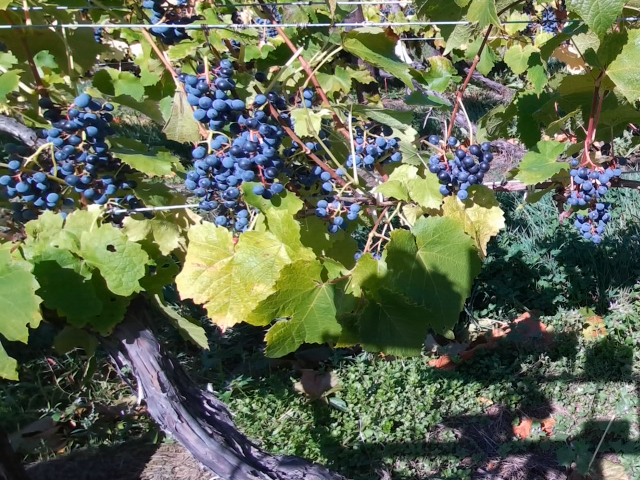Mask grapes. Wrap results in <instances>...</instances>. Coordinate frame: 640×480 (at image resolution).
Wrapping results in <instances>:
<instances>
[{
    "instance_id": "obj_1",
    "label": "grapes",
    "mask_w": 640,
    "mask_h": 480,
    "mask_svg": "<svg viewBox=\"0 0 640 480\" xmlns=\"http://www.w3.org/2000/svg\"><path fill=\"white\" fill-rule=\"evenodd\" d=\"M233 62L223 58L219 62L217 78L211 81V86L205 77H198L192 72H182L178 75L186 87L189 97L187 104L199 107L192 113V118L202 124L208 123L210 130H220L228 123V132L239 135L233 139L232 146L218 158L215 152L207 155L208 149L197 146L191 151L195 170L186 173L185 186L194 190L196 197H202L198 202L201 210H213L219 206L217 199H209L212 191L223 200L225 208H231L237 219L233 223L231 218L219 215L215 220L217 227L230 226L240 230L249 224V210L236 205V198L242 193L240 185L243 181L255 179V165L261 166L263 182L270 184L285 169V163L277 158V152L282 145L279 138L285 136V131L274 124L266 123V113L262 110L253 112V116L237 114L243 111L245 103L240 98H228V93L236 86L233 74Z\"/></svg>"
},
{
    "instance_id": "obj_2",
    "label": "grapes",
    "mask_w": 640,
    "mask_h": 480,
    "mask_svg": "<svg viewBox=\"0 0 640 480\" xmlns=\"http://www.w3.org/2000/svg\"><path fill=\"white\" fill-rule=\"evenodd\" d=\"M46 121L52 120V127L46 129L39 127L36 135L45 139L54 146H60L63 138L62 132L72 134L61 148L54 152V160L58 165L52 166L49 174L53 175L57 169L64 177V183L72 186L76 193H82L87 199H91L97 205H105L121 188L134 190L137 182L127 179L124 173H119L115 178L111 175L100 173L113 172L116 169L114 155L109 150V144L105 137L110 133L112 112L114 106L106 103L103 106L97 100H91L88 93H80L72 100V106L68 110V118L60 115L61 109L52 106L49 97H42L38 101ZM80 133L87 137V143L91 146V152L79 151L76 147L81 143Z\"/></svg>"
},
{
    "instance_id": "obj_3",
    "label": "grapes",
    "mask_w": 640,
    "mask_h": 480,
    "mask_svg": "<svg viewBox=\"0 0 640 480\" xmlns=\"http://www.w3.org/2000/svg\"><path fill=\"white\" fill-rule=\"evenodd\" d=\"M489 142H484L481 147L473 144L469 148L472 156H466L463 148L454 151V160H449L447 164L440 163L439 155H432L428 160V168L432 174L457 187V197L461 201L468 199V189L474 185H481L485 179V173L490 169V162L494 159Z\"/></svg>"
},
{
    "instance_id": "obj_4",
    "label": "grapes",
    "mask_w": 640,
    "mask_h": 480,
    "mask_svg": "<svg viewBox=\"0 0 640 480\" xmlns=\"http://www.w3.org/2000/svg\"><path fill=\"white\" fill-rule=\"evenodd\" d=\"M0 185L5 198L22 195L26 202L33 201L35 208L42 207L44 211L55 207L63 199L60 184L52 178H47L44 172H34L32 175L24 173L20 181L4 174L0 177Z\"/></svg>"
},
{
    "instance_id": "obj_5",
    "label": "grapes",
    "mask_w": 640,
    "mask_h": 480,
    "mask_svg": "<svg viewBox=\"0 0 640 480\" xmlns=\"http://www.w3.org/2000/svg\"><path fill=\"white\" fill-rule=\"evenodd\" d=\"M355 130L357 132L355 137L357 146L354 149L355 159L352 154L347 156V161L345 162L347 168H352L355 163L357 169L365 167L367 170L372 171L375 162L385 154L386 150H397L399 148L400 139L398 137L384 139L383 137L369 135L365 138L368 144L363 145L364 131L370 130L372 134L380 135L382 133L384 136H392L394 131L389 125L382 127L380 124H376L373 127V124L368 122L362 127L357 125Z\"/></svg>"
},
{
    "instance_id": "obj_6",
    "label": "grapes",
    "mask_w": 640,
    "mask_h": 480,
    "mask_svg": "<svg viewBox=\"0 0 640 480\" xmlns=\"http://www.w3.org/2000/svg\"><path fill=\"white\" fill-rule=\"evenodd\" d=\"M570 175L576 187L567 196L570 205L585 206L593 196L601 197L608 192V183L613 177H619L621 170L618 167H609L603 171L591 170L589 167L572 168Z\"/></svg>"
},
{
    "instance_id": "obj_7",
    "label": "grapes",
    "mask_w": 640,
    "mask_h": 480,
    "mask_svg": "<svg viewBox=\"0 0 640 480\" xmlns=\"http://www.w3.org/2000/svg\"><path fill=\"white\" fill-rule=\"evenodd\" d=\"M596 210L589 213V218L594 220L595 232L591 231L592 224L589 221H585L583 215H578L573 221V227L580 229V235L585 239H590L595 246H598L603 242V231L606 226V222H609L612 218V214L608 211L612 208V204L609 201L596 202L594 204Z\"/></svg>"
},
{
    "instance_id": "obj_8",
    "label": "grapes",
    "mask_w": 640,
    "mask_h": 480,
    "mask_svg": "<svg viewBox=\"0 0 640 480\" xmlns=\"http://www.w3.org/2000/svg\"><path fill=\"white\" fill-rule=\"evenodd\" d=\"M267 101L270 102L277 111H281L279 115L281 116L282 120H287L288 125L292 128V130H294V123L296 122V119L290 117L288 113H285L283 111L287 108V96L285 94L279 95L276 90H271L266 95L260 94L254 97V104L256 106L265 104Z\"/></svg>"
},
{
    "instance_id": "obj_9",
    "label": "grapes",
    "mask_w": 640,
    "mask_h": 480,
    "mask_svg": "<svg viewBox=\"0 0 640 480\" xmlns=\"http://www.w3.org/2000/svg\"><path fill=\"white\" fill-rule=\"evenodd\" d=\"M318 179L321 181L320 188L323 192H333L334 186L329 181L331 174L323 170L319 165H315L311 172L302 173L297 177V181L305 187H311Z\"/></svg>"
},
{
    "instance_id": "obj_10",
    "label": "grapes",
    "mask_w": 640,
    "mask_h": 480,
    "mask_svg": "<svg viewBox=\"0 0 640 480\" xmlns=\"http://www.w3.org/2000/svg\"><path fill=\"white\" fill-rule=\"evenodd\" d=\"M150 33L161 37L167 46H172L174 43H182L187 38L185 28L150 29Z\"/></svg>"
},
{
    "instance_id": "obj_11",
    "label": "grapes",
    "mask_w": 640,
    "mask_h": 480,
    "mask_svg": "<svg viewBox=\"0 0 640 480\" xmlns=\"http://www.w3.org/2000/svg\"><path fill=\"white\" fill-rule=\"evenodd\" d=\"M166 2L167 0H143V7L146 10L152 9L153 16L149 19L150 24H159L162 21V17L165 15V10L161 5Z\"/></svg>"
},
{
    "instance_id": "obj_12",
    "label": "grapes",
    "mask_w": 640,
    "mask_h": 480,
    "mask_svg": "<svg viewBox=\"0 0 640 480\" xmlns=\"http://www.w3.org/2000/svg\"><path fill=\"white\" fill-rule=\"evenodd\" d=\"M285 185L283 183H272L270 188H265L263 185H255L253 187V194L260 196L264 200H270L275 194H282L284 192Z\"/></svg>"
},
{
    "instance_id": "obj_13",
    "label": "grapes",
    "mask_w": 640,
    "mask_h": 480,
    "mask_svg": "<svg viewBox=\"0 0 640 480\" xmlns=\"http://www.w3.org/2000/svg\"><path fill=\"white\" fill-rule=\"evenodd\" d=\"M348 210L347 219L349 221H356L358 219V212L361 210V206L358 203L342 202L341 200H333L331 207L334 210H338L340 207Z\"/></svg>"
},
{
    "instance_id": "obj_14",
    "label": "grapes",
    "mask_w": 640,
    "mask_h": 480,
    "mask_svg": "<svg viewBox=\"0 0 640 480\" xmlns=\"http://www.w3.org/2000/svg\"><path fill=\"white\" fill-rule=\"evenodd\" d=\"M201 18L199 13L192 14L190 16H183L175 14L174 12H169L167 14V18L165 19L166 23H187L191 24L192 22L198 21Z\"/></svg>"
},
{
    "instance_id": "obj_15",
    "label": "grapes",
    "mask_w": 640,
    "mask_h": 480,
    "mask_svg": "<svg viewBox=\"0 0 640 480\" xmlns=\"http://www.w3.org/2000/svg\"><path fill=\"white\" fill-rule=\"evenodd\" d=\"M347 227H348V223L345 221V219L341 216H336L332 220V224H329L327 226V231L329 233L336 234L338 230H345Z\"/></svg>"
},
{
    "instance_id": "obj_16",
    "label": "grapes",
    "mask_w": 640,
    "mask_h": 480,
    "mask_svg": "<svg viewBox=\"0 0 640 480\" xmlns=\"http://www.w3.org/2000/svg\"><path fill=\"white\" fill-rule=\"evenodd\" d=\"M123 201L129 203L130 207H137L139 205V201L137 200L136 195H127L124 197H115L114 202L116 204H121Z\"/></svg>"
},
{
    "instance_id": "obj_17",
    "label": "grapes",
    "mask_w": 640,
    "mask_h": 480,
    "mask_svg": "<svg viewBox=\"0 0 640 480\" xmlns=\"http://www.w3.org/2000/svg\"><path fill=\"white\" fill-rule=\"evenodd\" d=\"M303 100L301 101V107L306 108L310 107L313 104L312 99L315 97V94L310 88H306L303 92Z\"/></svg>"
},
{
    "instance_id": "obj_18",
    "label": "grapes",
    "mask_w": 640,
    "mask_h": 480,
    "mask_svg": "<svg viewBox=\"0 0 640 480\" xmlns=\"http://www.w3.org/2000/svg\"><path fill=\"white\" fill-rule=\"evenodd\" d=\"M290 146H291L290 148H285L283 150V155L285 157H291L293 154L297 152V149H299L298 142H295L293 140L290 142Z\"/></svg>"
}]
</instances>
